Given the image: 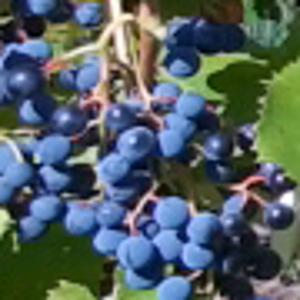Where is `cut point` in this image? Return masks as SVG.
Returning a JSON list of instances; mask_svg holds the SVG:
<instances>
[{"label": "cut point", "instance_id": "obj_1", "mask_svg": "<svg viewBox=\"0 0 300 300\" xmlns=\"http://www.w3.org/2000/svg\"><path fill=\"white\" fill-rule=\"evenodd\" d=\"M138 13L126 12L121 14L113 24H110L105 32L97 38V42L89 43L83 47H73L69 50L71 57L88 56L97 52V58L104 60L106 58V43H108L127 22L139 23Z\"/></svg>", "mask_w": 300, "mask_h": 300}]
</instances>
